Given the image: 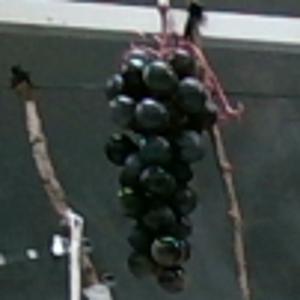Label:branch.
Masks as SVG:
<instances>
[{"label": "branch", "instance_id": "obj_1", "mask_svg": "<svg viewBox=\"0 0 300 300\" xmlns=\"http://www.w3.org/2000/svg\"><path fill=\"white\" fill-rule=\"evenodd\" d=\"M10 87L24 116L32 158L42 187L53 210L57 213L71 245L80 289L87 300H114L112 293L104 284L98 267L85 247L71 206L67 203L64 187L56 174L50 156L49 133L38 106L32 71L25 69L22 64H11Z\"/></svg>", "mask_w": 300, "mask_h": 300}, {"label": "branch", "instance_id": "obj_2", "mask_svg": "<svg viewBox=\"0 0 300 300\" xmlns=\"http://www.w3.org/2000/svg\"><path fill=\"white\" fill-rule=\"evenodd\" d=\"M221 132L220 124L212 130L205 131L209 137L218 164V169L230 207L227 214L231 218L232 255L240 289V297L241 300H255L254 289L252 288L250 258L246 250L243 233L242 206L234 184L232 166L226 156Z\"/></svg>", "mask_w": 300, "mask_h": 300}, {"label": "branch", "instance_id": "obj_3", "mask_svg": "<svg viewBox=\"0 0 300 300\" xmlns=\"http://www.w3.org/2000/svg\"><path fill=\"white\" fill-rule=\"evenodd\" d=\"M187 12L188 18L184 24L182 47L193 51L197 56L199 30L207 24L208 20L204 14L203 6L193 0L189 1Z\"/></svg>", "mask_w": 300, "mask_h": 300}]
</instances>
